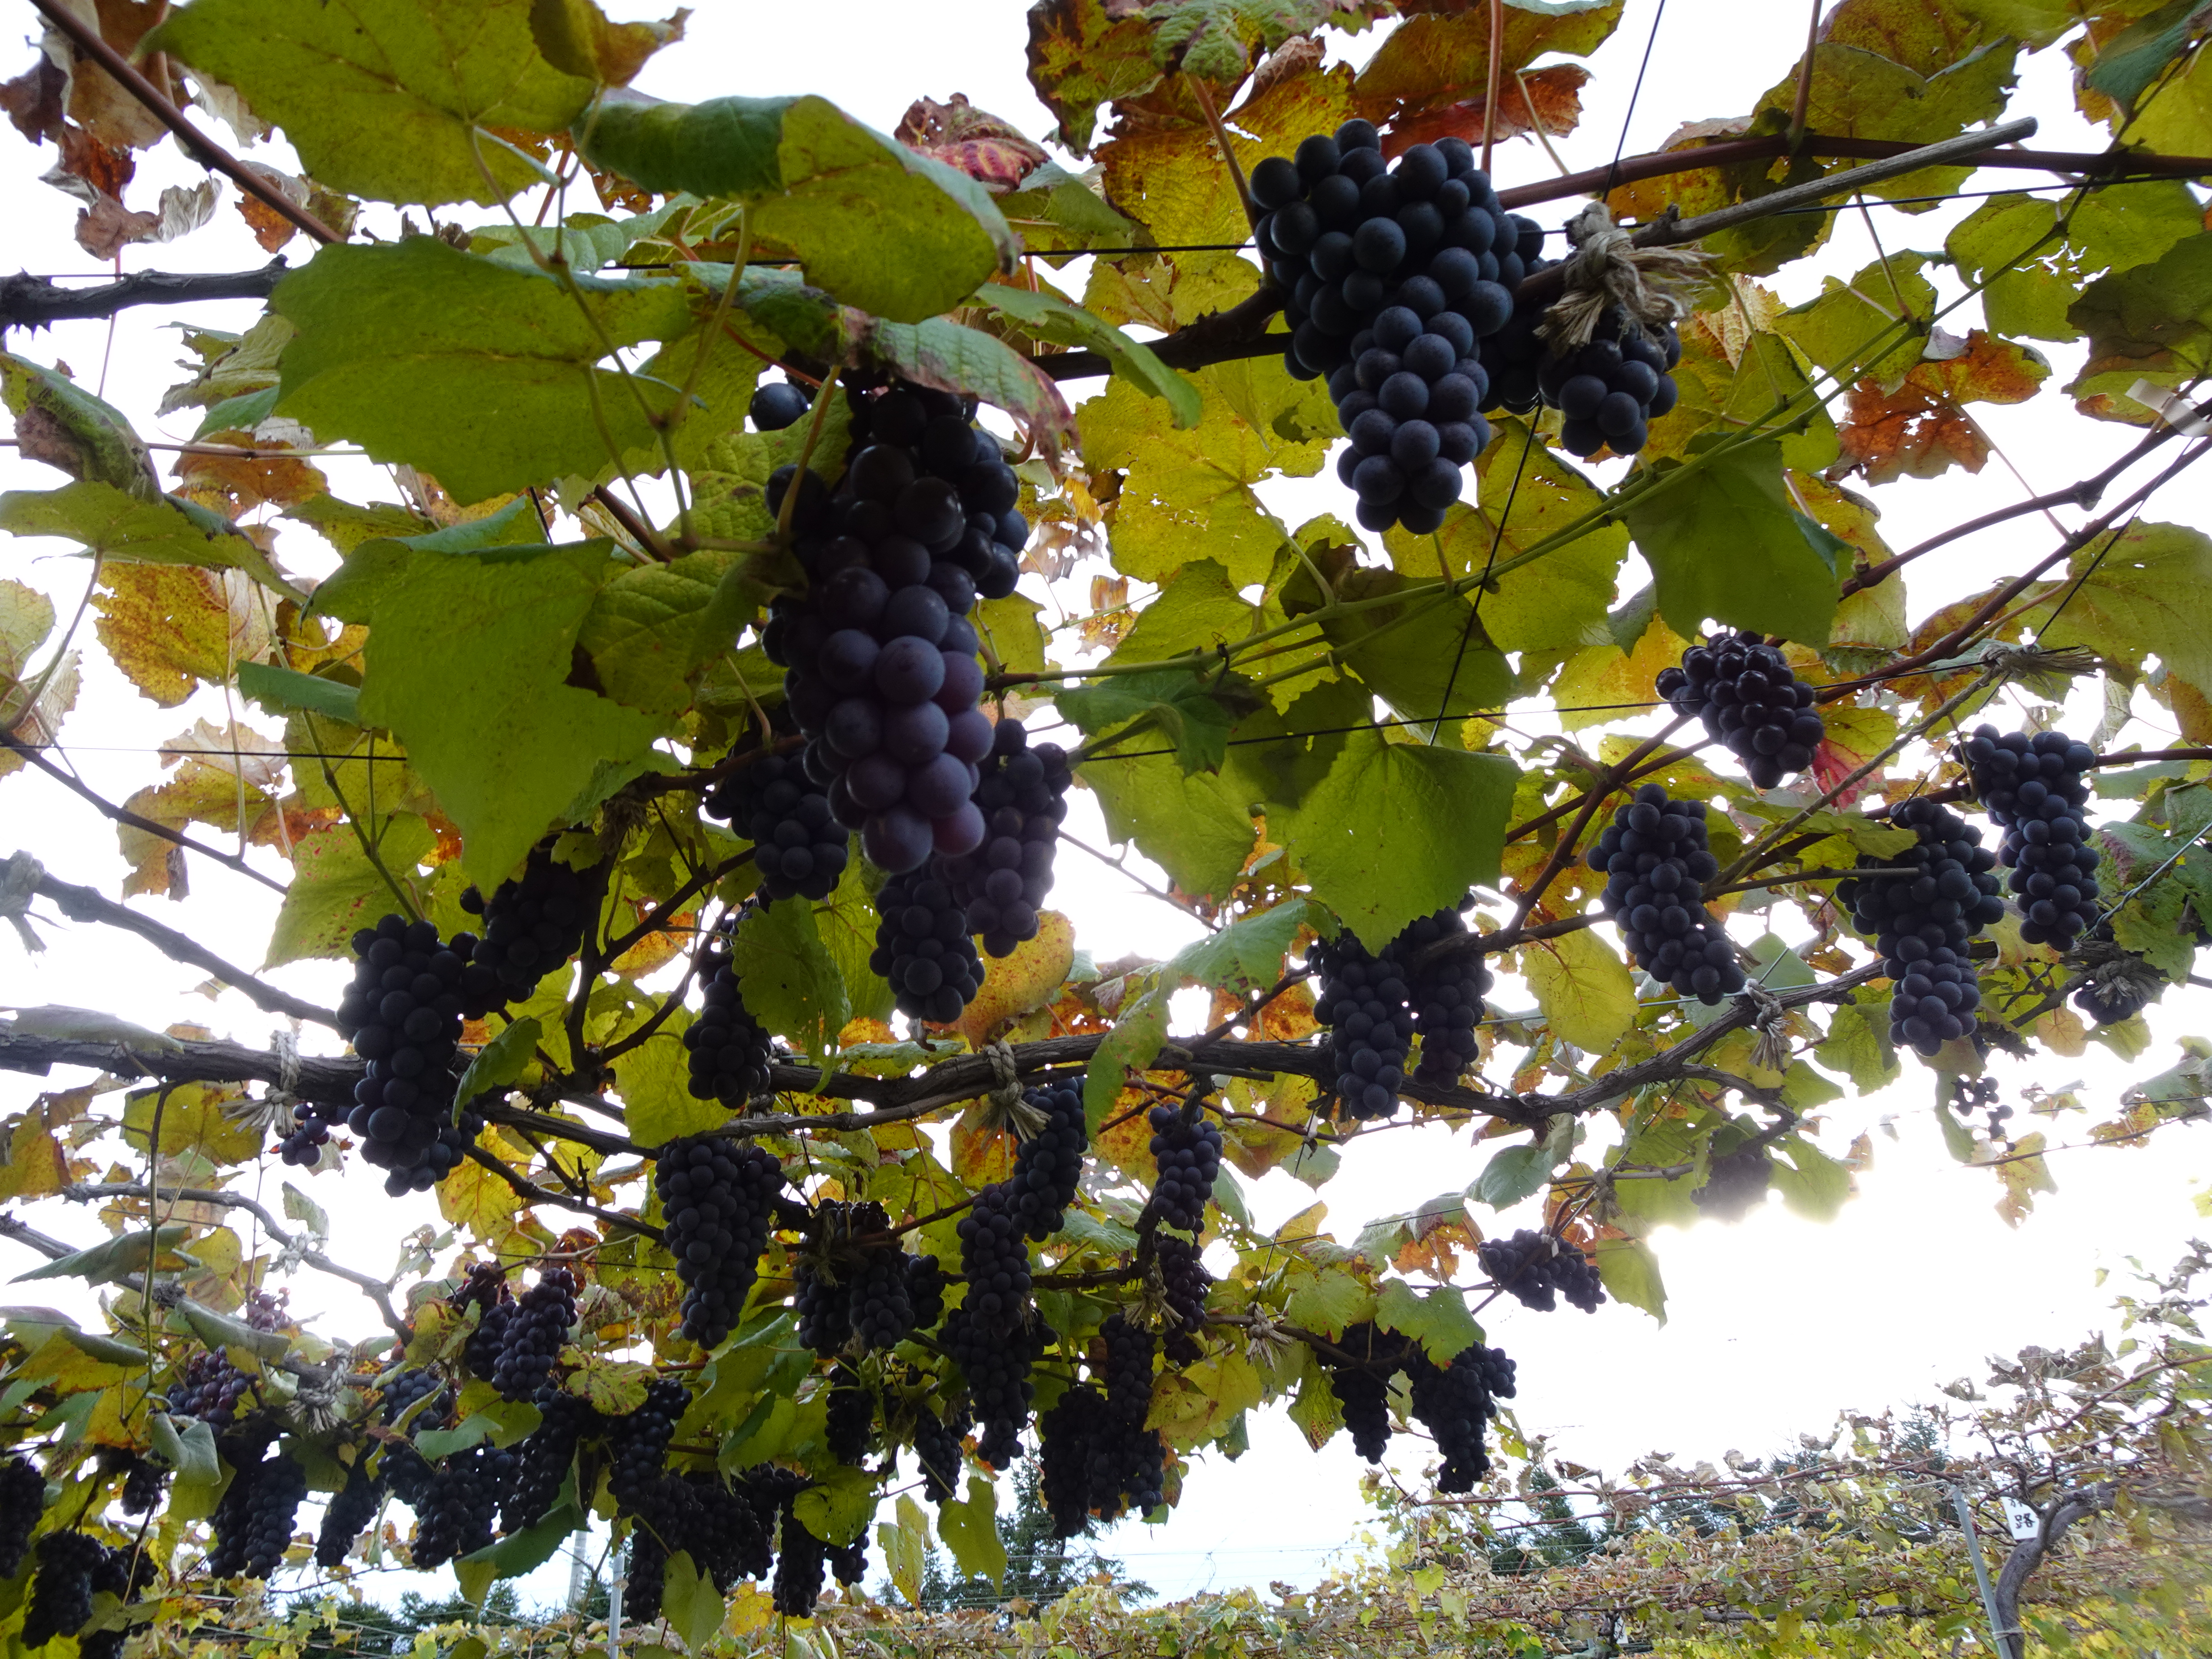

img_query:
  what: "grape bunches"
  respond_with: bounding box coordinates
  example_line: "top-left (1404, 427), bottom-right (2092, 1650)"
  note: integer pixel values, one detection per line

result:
top-left (488, 1263), bottom-right (579, 1402)
top-left (0, 1454), bottom-right (43, 1582)
top-left (1540, 300), bottom-right (1685, 463)
top-left (115, 1447), bottom-right (169, 1514)
top-left (1311, 1317), bottom-right (1410, 1466)
top-left (1084, 1422), bottom-right (1128, 1523)
top-left (1121, 1427), bottom-right (1168, 1517)
top-left (1099, 1309), bottom-right (1158, 1431)
top-left (676, 1144), bottom-right (790, 1352)
top-left (279, 1100), bottom-right (328, 1167)
top-left (36, 1531), bottom-right (104, 1636)
top-left (1037, 1385), bottom-right (1106, 1547)
top-left (1396, 892), bottom-right (1493, 1089)
top-left (773, 1475), bottom-right (826, 1622)
top-left (460, 1436), bottom-right (505, 1558)
top-left (914, 1384), bottom-right (975, 1513)
top-left (1587, 780), bottom-right (1748, 1006)
top-left (201, 1475), bottom-right (248, 1580)
top-left (2071, 983), bottom-right (2144, 1029)
top-left (1256, 117), bottom-right (1549, 537)
top-left (705, 758), bottom-right (775, 845)
top-left (165, 1345), bottom-right (251, 1442)
top-left (1305, 924), bottom-right (1413, 1120)
top-left (955, 1180), bottom-right (1031, 1341)
top-left (866, 864), bottom-right (989, 1025)
top-left (1152, 1234), bottom-right (1220, 1336)
top-left (78, 1629), bottom-right (134, 1659)
top-left (843, 1229), bottom-right (915, 1350)
top-left (1689, 1148), bottom-right (1770, 1229)
top-left (746, 364), bottom-right (1031, 874)
top-left (94, 1551), bottom-right (142, 1603)
top-left (619, 1521), bottom-right (675, 1630)
top-left (508, 1441), bottom-right (553, 1535)
top-left (1549, 1236), bottom-right (1612, 1316)
top-left (903, 1255), bottom-right (946, 1331)
top-left (408, 1462), bottom-right (473, 1568)
top-left (338, 905), bottom-right (480, 1194)
top-left (244, 1295), bottom-right (292, 1333)
top-left (532, 1385), bottom-right (600, 1454)
top-left (452, 1259), bottom-right (516, 1381)
top-left (1146, 1099), bottom-right (1218, 1231)
top-left (1477, 1229), bottom-right (1558, 1315)
top-left (653, 1130), bottom-right (736, 1295)
top-left (825, 1520), bottom-right (875, 1590)
top-left (385, 1370), bottom-right (447, 1478)
top-left (809, 1192), bottom-right (897, 1236)
top-left (1834, 797), bottom-right (2007, 1055)
top-left (746, 777), bottom-right (852, 899)
top-left (127, 1542), bottom-right (160, 1607)
top-left (691, 1483), bottom-right (777, 1577)
top-left (939, 1308), bottom-right (1055, 1467)
top-left (604, 1376), bottom-right (696, 1520)
top-left (316, 1463), bottom-right (385, 1568)
top-left (959, 737), bottom-right (1075, 957)
top-left (1399, 1332), bottom-right (1520, 1493)
top-left (1650, 624), bottom-right (1828, 792)
top-left (1004, 1072), bottom-right (1091, 1243)
top-left (682, 962), bottom-right (775, 1111)
top-left (790, 1252), bottom-right (843, 1356)
top-left (826, 1354), bottom-right (871, 1473)
top-left (459, 829), bottom-right (614, 1027)
top-left (247, 1452), bottom-right (310, 1588)
top-left (1149, 1315), bottom-right (1213, 1370)
top-left (1951, 722), bottom-right (2100, 952)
